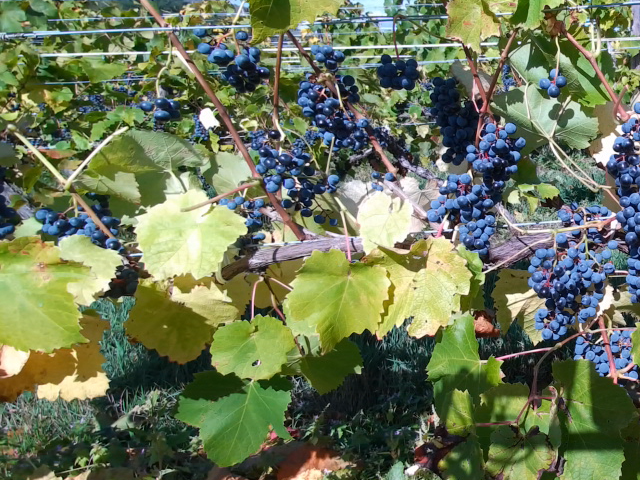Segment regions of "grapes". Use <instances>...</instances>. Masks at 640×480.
<instances>
[{
	"label": "grapes",
	"mask_w": 640,
	"mask_h": 480,
	"mask_svg": "<svg viewBox=\"0 0 640 480\" xmlns=\"http://www.w3.org/2000/svg\"><path fill=\"white\" fill-rule=\"evenodd\" d=\"M434 87L430 94L431 103L435 108L430 110L432 116H437L436 124L444 136L442 145L450 148L441 155L444 163L460 166L466 158L472 163L473 169L482 173L483 184H473L470 191L458 189L459 184L470 185L472 178L468 173H449L446 176V187H440L437 199L429 202L430 209L426 212L429 223L440 225L443 217L453 221L458 214V220L463 223L458 227L461 234L459 240L468 252L485 256L490 246V237L495 234L492 228L496 224L495 213L490 211L502 200L501 190L510 176L518 173L519 163L523 159L521 150L526 145L524 137L509 138L517 132V126L506 123L497 133V126L486 122L482 128L479 149L488 152L490 159L477 158L475 140L479 114L476 110L484 104L482 98L476 102L465 101L463 107L457 104L459 94L456 89L458 81L455 78L444 79L435 77Z\"/></svg>",
	"instance_id": "1"
},
{
	"label": "grapes",
	"mask_w": 640,
	"mask_h": 480,
	"mask_svg": "<svg viewBox=\"0 0 640 480\" xmlns=\"http://www.w3.org/2000/svg\"><path fill=\"white\" fill-rule=\"evenodd\" d=\"M566 255L558 260L553 268V275L537 270L542 265L545 270L552 267L556 252L552 248L536 250L530 258L527 271L531 277L527 285L537 293L539 298H547L545 307L535 313L534 327L541 330L544 341H560L568 332V326H575L577 321L585 323L588 317L596 315V307L604 297L607 275L615 272V265L607 262L599 271H594L596 262L587 259V245L569 243Z\"/></svg>",
	"instance_id": "2"
},
{
	"label": "grapes",
	"mask_w": 640,
	"mask_h": 480,
	"mask_svg": "<svg viewBox=\"0 0 640 480\" xmlns=\"http://www.w3.org/2000/svg\"><path fill=\"white\" fill-rule=\"evenodd\" d=\"M638 119L632 117L621 125L622 136L613 141V153L606 161V168L615 178L618 187L615 194L619 197L622 211L616 213L617 221L622 223L625 243L628 245L629 258L626 260L629 273L625 282L632 303H640V154H636L634 141H640L637 130Z\"/></svg>",
	"instance_id": "3"
},
{
	"label": "grapes",
	"mask_w": 640,
	"mask_h": 480,
	"mask_svg": "<svg viewBox=\"0 0 640 480\" xmlns=\"http://www.w3.org/2000/svg\"><path fill=\"white\" fill-rule=\"evenodd\" d=\"M252 151H258L260 161L256 165V170L260 174H266L270 169H274L276 172L272 175H266L265 191L267 193H276L282 187L288 190V196L290 199H284L280 204L285 210H290L293 207L292 201L299 199L301 204L305 206L300 213L302 218H310L312 216V210L309 208L313 205V199L315 195H323L325 193L332 194L337 190V185L340 183V176L338 174H331L327 177L326 181H321L317 185L308 180L307 178H300L298 183L303 185L301 188H297L296 181L290 176H283L287 171L290 175L298 176L304 174L305 176H312L314 169L311 166H305L311 160V155L308 152H302V149L298 146H293L290 149V154L280 153L272 145H263L260 141H253L250 144Z\"/></svg>",
	"instance_id": "4"
},
{
	"label": "grapes",
	"mask_w": 640,
	"mask_h": 480,
	"mask_svg": "<svg viewBox=\"0 0 640 480\" xmlns=\"http://www.w3.org/2000/svg\"><path fill=\"white\" fill-rule=\"evenodd\" d=\"M297 105L302 108L304 117H314L311 124L318 130V136L324 139V144L330 146L334 139L332 150L337 152L339 148L347 147L359 151L362 146L369 143L368 136L373 132V126L366 117L357 118L351 110L340 111L337 107L340 100L334 96H322L318 103L320 93H328L330 88L323 83L309 80L298 82Z\"/></svg>",
	"instance_id": "5"
},
{
	"label": "grapes",
	"mask_w": 640,
	"mask_h": 480,
	"mask_svg": "<svg viewBox=\"0 0 640 480\" xmlns=\"http://www.w3.org/2000/svg\"><path fill=\"white\" fill-rule=\"evenodd\" d=\"M196 51L207 55L210 64L226 67L221 75L223 81L229 82L238 92H254L256 84L262 79H269L272 71L267 66H259L262 51L257 46L244 47L241 55H236L224 43L214 47L207 42H198Z\"/></svg>",
	"instance_id": "6"
},
{
	"label": "grapes",
	"mask_w": 640,
	"mask_h": 480,
	"mask_svg": "<svg viewBox=\"0 0 640 480\" xmlns=\"http://www.w3.org/2000/svg\"><path fill=\"white\" fill-rule=\"evenodd\" d=\"M79 214L69 217L62 210L54 211L52 208H39L34 212L37 221H43L42 231L48 235H56L59 240L67 236L89 235L91 242L106 250L118 251L121 254L126 249L118 244L116 238H108L98 229L93 220L83 210L81 205L77 207Z\"/></svg>",
	"instance_id": "7"
},
{
	"label": "grapes",
	"mask_w": 640,
	"mask_h": 480,
	"mask_svg": "<svg viewBox=\"0 0 640 480\" xmlns=\"http://www.w3.org/2000/svg\"><path fill=\"white\" fill-rule=\"evenodd\" d=\"M389 54L381 56V65L378 68L380 78V86L382 88L391 87L394 91H400L404 88L406 91H412L416 87V79L420 77V72L416 69L417 62L413 58H409L406 63L397 61L395 65Z\"/></svg>",
	"instance_id": "8"
},
{
	"label": "grapes",
	"mask_w": 640,
	"mask_h": 480,
	"mask_svg": "<svg viewBox=\"0 0 640 480\" xmlns=\"http://www.w3.org/2000/svg\"><path fill=\"white\" fill-rule=\"evenodd\" d=\"M594 336L586 333L584 336L579 335L575 340L574 359L576 361L588 359L593 361L594 369L600 377H607L610 374L607 353L605 352L604 343L599 341L593 345Z\"/></svg>",
	"instance_id": "9"
},
{
	"label": "grapes",
	"mask_w": 640,
	"mask_h": 480,
	"mask_svg": "<svg viewBox=\"0 0 640 480\" xmlns=\"http://www.w3.org/2000/svg\"><path fill=\"white\" fill-rule=\"evenodd\" d=\"M633 336V332L631 330H618L615 329L613 333L609 336V341L612 346L613 356L615 368L617 370H623L626 366L633 362V355L630 353L632 351V341L631 337Z\"/></svg>",
	"instance_id": "10"
},
{
	"label": "grapes",
	"mask_w": 640,
	"mask_h": 480,
	"mask_svg": "<svg viewBox=\"0 0 640 480\" xmlns=\"http://www.w3.org/2000/svg\"><path fill=\"white\" fill-rule=\"evenodd\" d=\"M220 206L225 205L228 209L235 210L238 205H242V207L246 210H252L248 213V218L245 221L247 226H256L257 228H261L264 225V222L256 217H261L263 215V211L261 208L265 205V200L262 197H256L253 200H246L242 196H234L232 199L221 198L218 201Z\"/></svg>",
	"instance_id": "11"
},
{
	"label": "grapes",
	"mask_w": 640,
	"mask_h": 480,
	"mask_svg": "<svg viewBox=\"0 0 640 480\" xmlns=\"http://www.w3.org/2000/svg\"><path fill=\"white\" fill-rule=\"evenodd\" d=\"M140 109L146 112H152L155 109L153 117L158 121H169L172 117L181 116L180 102L173 97L156 98L154 104L143 100L140 103Z\"/></svg>",
	"instance_id": "12"
},
{
	"label": "grapes",
	"mask_w": 640,
	"mask_h": 480,
	"mask_svg": "<svg viewBox=\"0 0 640 480\" xmlns=\"http://www.w3.org/2000/svg\"><path fill=\"white\" fill-rule=\"evenodd\" d=\"M86 197L93 201H98V205L93 204L91 208L99 216L101 221L113 231L114 236H117L119 234L117 226L121 223V219L118 216L111 215L112 210L108 202L111 195L109 193L98 195L96 192H88Z\"/></svg>",
	"instance_id": "13"
},
{
	"label": "grapes",
	"mask_w": 640,
	"mask_h": 480,
	"mask_svg": "<svg viewBox=\"0 0 640 480\" xmlns=\"http://www.w3.org/2000/svg\"><path fill=\"white\" fill-rule=\"evenodd\" d=\"M309 52L315 55V59L323 63L330 72H336L339 68V62L345 60V54L341 50H334L330 45H312Z\"/></svg>",
	"instance_id": "14"
},
{
	"label": "grapes",
	"mask_w": 640,
	"mask_h": 480,
	"mask_svg": "<svg viewBox=\"0 0 640 480\" xmlns=\"http://www.w3.org/2000/svg\"><path fill=\"white\" fill-rule=\"evenodd\" d=\"M549 77L555 79V84L548 78L542 77L538 80V85L542 90H547V95L550 98H558L561 95V89L567 85V78L558 72L555 68H552L549 72Z\"/></svg>",
	"instance_id": "15"
},
{
	"label": "grapes",
	"mask_w": 640,
	"mask_h": 480,
	"mask_svg": "<svg viewBox=\"0 0 640 480\" xmlns=\"http://www.w3.org/2000/svg\"><path fill=\"white\" fill-rule=\"evenodd\" d=\"M355 82L356 78L351 74H341L339 76L338 88L340 95L346 97V101L352 105H357L360 102V96L357 94L359 87L354 84Z\"/></svg>",
	"instance_id": "16"
},
{
	"label": "grapes",
	"mask_w": 640,
	"mask_h": 480,
	"mask_svg": "<svg viewBox=\"0 0 640 480\" xmlns=\"http://www.w3.org/2000/svg\"><path fill=\"white\" fill-rule=\"evenodd\" d=\"M16 215V209L6 203V198L0 195V240H4L9 233L14 231L12 222H5V218H13Z\"/></svg>",
	"instance_id": "17"
},
{
	"label": "grapes",
	"mask_w": 640,
	"mask_h": 480,
	"mask_svg": "<svg viewBox=\"0 0 640 480\" xmlns=\"http://www.w3.org/2000/svg\"><path fill=\"white\" fill-rule=\"evenodd\" d=\"M557 217L561 222L571 223L574 220L577 225L584 224V213L582 211H577L572 216L566 207H561L557 211Z\"/></svg>",
	"instance_id": "18"
},
{
	"label": "grapes",
	"mask_w": 640,
	"mask_h": 480,
	"mask_svg": "<svg viewBox=\"0 0 640 480\" xmlns=\"http://www.w3.org/2000/svg\"><path fill=\"white\" fill-rule=\"evenodd\" d=\"M606 247L609 250H618L620 248V244L615 240H608L606 242ZM609 250H603L601 253H597L594 249H591L589 251V255L593 259H596L598 263H601L603 261V258L605 260H609L611 258V252Z\"/></svg>",
	"instance_id": "19"
},
{
	"label": "grapes",
	"mask_w": 640,
	"mask_h": 480,
	"mask_svg": "<svg viewBox=\"0 0 640 480\" xmlns=\"http://www.w3.org/2000/svg\"><path fill=\"white\" fill-rule=\"evenodd\" d=\"M585 212L587 213L586 220L588 222L595 221L597 219L596 214L608 217L612 215V211L609 208L606 206L600 207L598 204H593L591 207H587Z\"/></svg>",
	"instance_id": "20"
},
{
	"label": "grapes",
	"mask_w": 640,
	"mask_h": 480,
	"mask_svg": "<svg viewBox=\"0 0 640 480\" xmlns=\"http://www.w3.org/2000/svg\"><path fill=\"white\" fill-rule=\"evenodd\" d=\"M587 238L596 244H602L604 242L602 235L596 228L587 229Z\"/></svg>",
	"instance_id": "21"
},
{
	"label": "grapes",
	"mask_w": 640,
	"mask_h": 480,
	"mask_svg": "<svg viewBox=\"0 0 640 480\" xmlns=\"http://www.w3.org/2000/svg\"><path fill=\"white\" fill-rule=\"evenodd\" d=\"M638 369H639V366H638L637 364H634V365L631 367V370H625V371L623 372V375H624L625 377L630 378V379H633V378H634L635 380H638V379L640 378V374L638 373Z\"/></svg>",
	"instance_id": "22"
}]
</instances>
